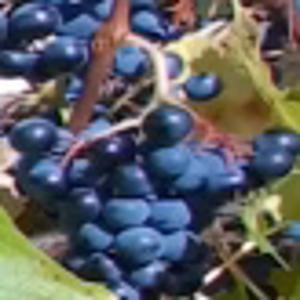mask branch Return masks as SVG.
Masks as SVG:
<instances>
[{
    "instance_id": "obj_1",
    "label": "branch",
    "mask_w": 300,
    "mask_h": 300,
    "mask_svg": "<svg viewBox=\"0 0 300 300\" xmlns=\"http://www.w3.org/2000/svg\"><path fill=\"white\" fill-rule=\"evenodd\" d=\"M130 4L120 0L108 19L94 35L91 42L92 69L87 77L86 85L80 99L75 103L69 118V128L74 133L84 129L83 121L90 114L96 101L102 79L112 63V53L117 46L124 43L121 34L128 31Z\"/></svg>"
}]
</instances>
